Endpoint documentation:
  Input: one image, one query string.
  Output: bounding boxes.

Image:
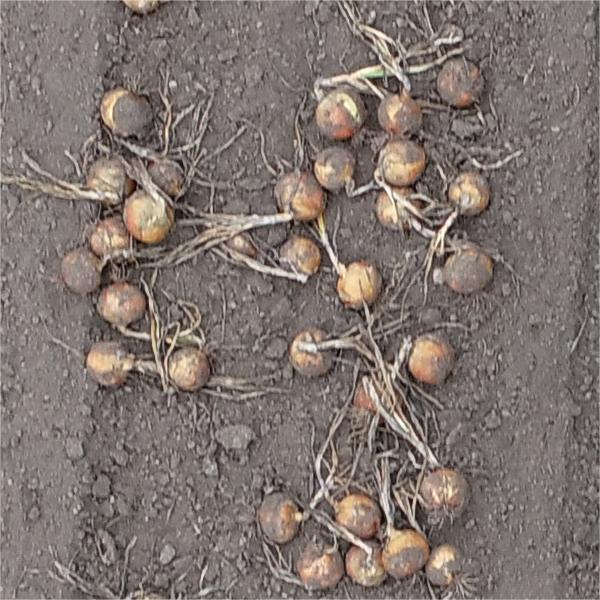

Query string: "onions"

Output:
[288,328,328,374]
[377,89,420,130]
[165,346,209,390]
[144,155,184,196]
[422,542,457,581]
[405,334,456,383]
[382,528,428,577]
[122,0,157,15]
[58,249,102,294]
[345,547,381,584]
[122,190,172,239]
[280,235,319,274]
[335,262,380,304]
[351,383,377,414]
[86,340,133,385]
[299,546,341,586]
[98,89,153,135]
[435,59,480,105]
[311,145,355,188]
[379,138,425,183]
[375,191,412,228]
[276,171,324,218]
[353,379,406,416]
[97,282,145,324]
[89,219,129,257]
[440,242,492,293]
[334,492,382,538]
[315,91,362,138]
[421,468,469,513]
[445,171,487,211]
[86,156,126,202]
[257,493,302,541]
